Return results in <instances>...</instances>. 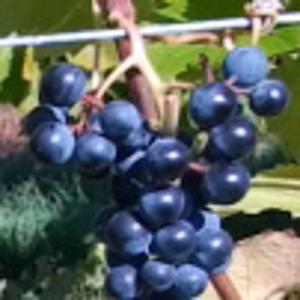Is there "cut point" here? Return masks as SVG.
I'll use <instances>...</instances> for the list:
<instances>
[{"label":"cut point","mask_w":300,"mask_h":300,"mask_svg":"<svg viewBox=\"0 0 300 300\" xmlns=\"http://www.w3.org/2000/svg\"><path fill=\"white\" fill-rule=\"evenodd\" d=\"M108 19L112 23L121 24L129 32L134 55L122 59L115 70L98 84L97 92L104 95L107 89L124 75L128 67L138 65L141 74L145 77L154 93L155 101L159 105H164L167 102L166 91L145 54L140 27L125 13L111 11L108 14Z\"/></svg>","instance_id":"6a23745f"}]
</instances>
